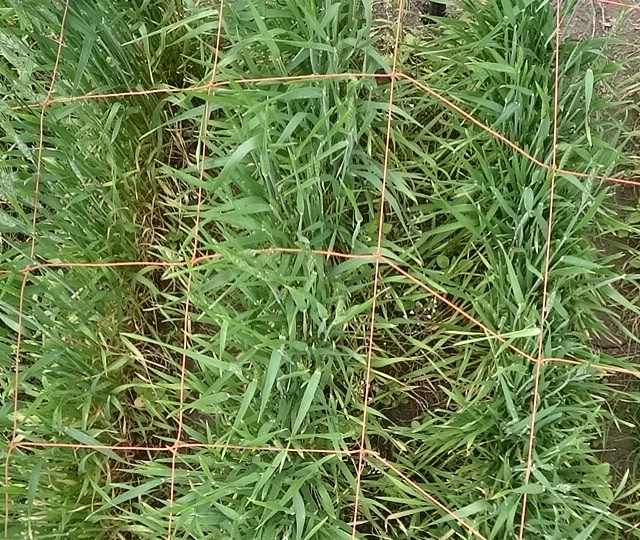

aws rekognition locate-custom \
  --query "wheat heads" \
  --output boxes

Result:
[2,45,21,69]
[21,192,42,207]
[39,8,60,24]
[0,210,14,226]
[69,161,83,179]
[346,97,356,123]
[11,82,35,104]
[565,435,583,446]
[575,361,587,374]
[336,299,343,314]
[259,151,267,176]
[579,170,594,200]
[561,146,572,169]
[15,135,36,161]
[216,249,255,278]
[554,482,571,495]
[238,249,255,256]
[545,292,555,312]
